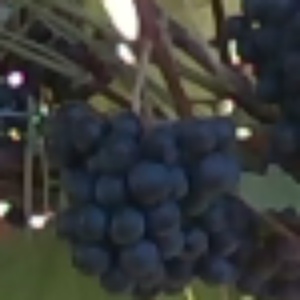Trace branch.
<instances>
[{
	"instance_id": "obj_1",
	"label": "branch",
	"mask_w": 300,
	"mask_h": 300,
	"mask_svg": "<svg viewBox=\"0 0 300 300\" xmlns=\"http://www.w3.org/2000/svg\"><path fill=\"white\" fill-rule=\"evenodd\" d=\"M133 5L140 21V39L143 41L142 37H146L152 43L149 61L157 66L167 89L172 91L178 116L192 114L191 102L185 90L180 87L182 73L191 82L221 99L232 100L246 115H251L259 123H276L280 120L282 108L268 100L252 97L251 82L233 67L234 61L229 54L224 26L222 0H211L218 56L208 49L205 42L190 34L182 22L167 15L162 4L153 0H133ZM171 37L182 42L192 55L201 58L219 78L177 59Z\"/></svg>"
}]
</instances>
